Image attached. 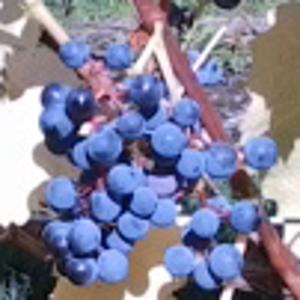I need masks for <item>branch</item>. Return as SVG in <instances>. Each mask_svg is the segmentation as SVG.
<instances>
[{
    "instance_id": "obj_1",
    "label": "branch",
    "mask_w": 300,
    "mask_h": 300,
    "mask_svg": "<svg viewBox=\"0 0 300 300\" xmlns=\"http://www.w3.org/2000/svg\"><path fill=\"white\" fill-rule=\"evenodd\" d=\"M134 6L142 16L143 28L147 32L160 30L161 38L171 57L172 67L178 80L188 92L191 100L201 111V118L209 138L223 142L227 138V128L214 106L204 94L200 85L190 73L183 50L173 31L172 21L159 0H134Z\"/></svg>"
},
{
    "instance_id": "obj_2",
    "label": "branch",
    "mask_w": 300,
    "mask_h": 300,
    "mask_svg": "<svg viewBox=\"0 0 300 300\" xmlns=\"http://www.w3.org/2000/svg\"><path fill=\"white\" fill-rule=\"evenodd\" d=\"M259 235L281 280L293 296L300 297V265L284 245L276 226L269 220L262 221Z\"/></svg>"
},
{
    "instance_id": "obj_3",
    "label": "branch",
    "mask_w": 300,
    "mask_h": 300,
    "mask_svg": "<svg viewBox=\"0 0 300 300\" xmlns=\"http://www.w3.org/2000/svg\"><path fill=\"white\" fill-rule=\"evenodd\" d=\"M82 81L95 87V101L104 113L113 115L122 112L127 105V97L123 89L120 88L110 77L102 62L92 60L82 68L80 72Z\"/></svg>"
},
{
    "instance_id": "obj_4",
    "label": "branch",
    "mask_w": 300,
    "mask_h": 300,
    "mask_svg": "<svg viewBox=\"0 0 300 300\" xmlns=\"http://www.w3.org/2000/svg\"><path fill=\"white\" fill-rule=\"evenodd\" d=\"M24 7L32 13L35 20L44 28L50 37L58 44H63L67 40V34L54 18L46 12L42 3L37 0H25Z\"/></svg>"
},
{
    "instance_id": "obj_5",
    "label": "branch",
    "mask_w": 300,
    "mask_h": 300,
    "mask_svg": "<svg viewBox=\"0 0 300 300\" xmlns=\"http://www.w3.org/2000/svg\"><path fill=\"white\" fill-rule=\"evenodd\" d=\"M231 193L236 199L252 200L255 198L256 188L246 171L239 170L236 172L232 180Z\"/></svg>"
}]
</instances>
